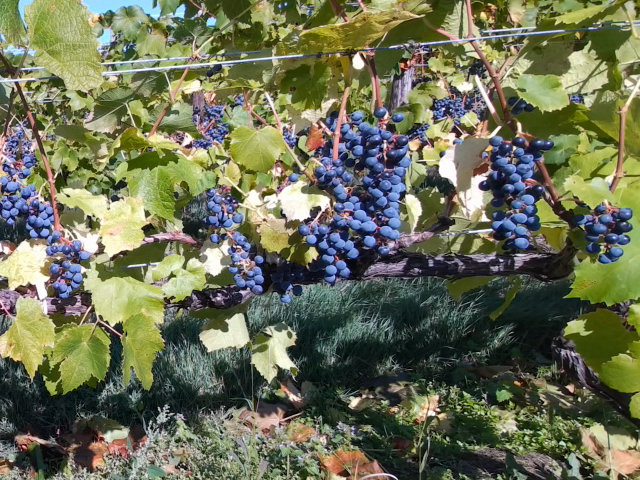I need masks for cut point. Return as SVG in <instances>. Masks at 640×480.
<instances>
[{"label": "cut point", "instance_id": "6a23745f", "mask_svg": "<svg viewBox=\"0 0 640 480\" xmlns=\"http://www.w3.org/2000/svg\"><path fill=\"white\" fill-rule=\"evenodd\" d=\"M313 161H316L317 164H321V160L317 157H311L310 159L307 160V162L303 165L305 168H307L309 166V164Z\"/></svg>", "mask_w": 640, "mask_h": 480}]
</instances>
